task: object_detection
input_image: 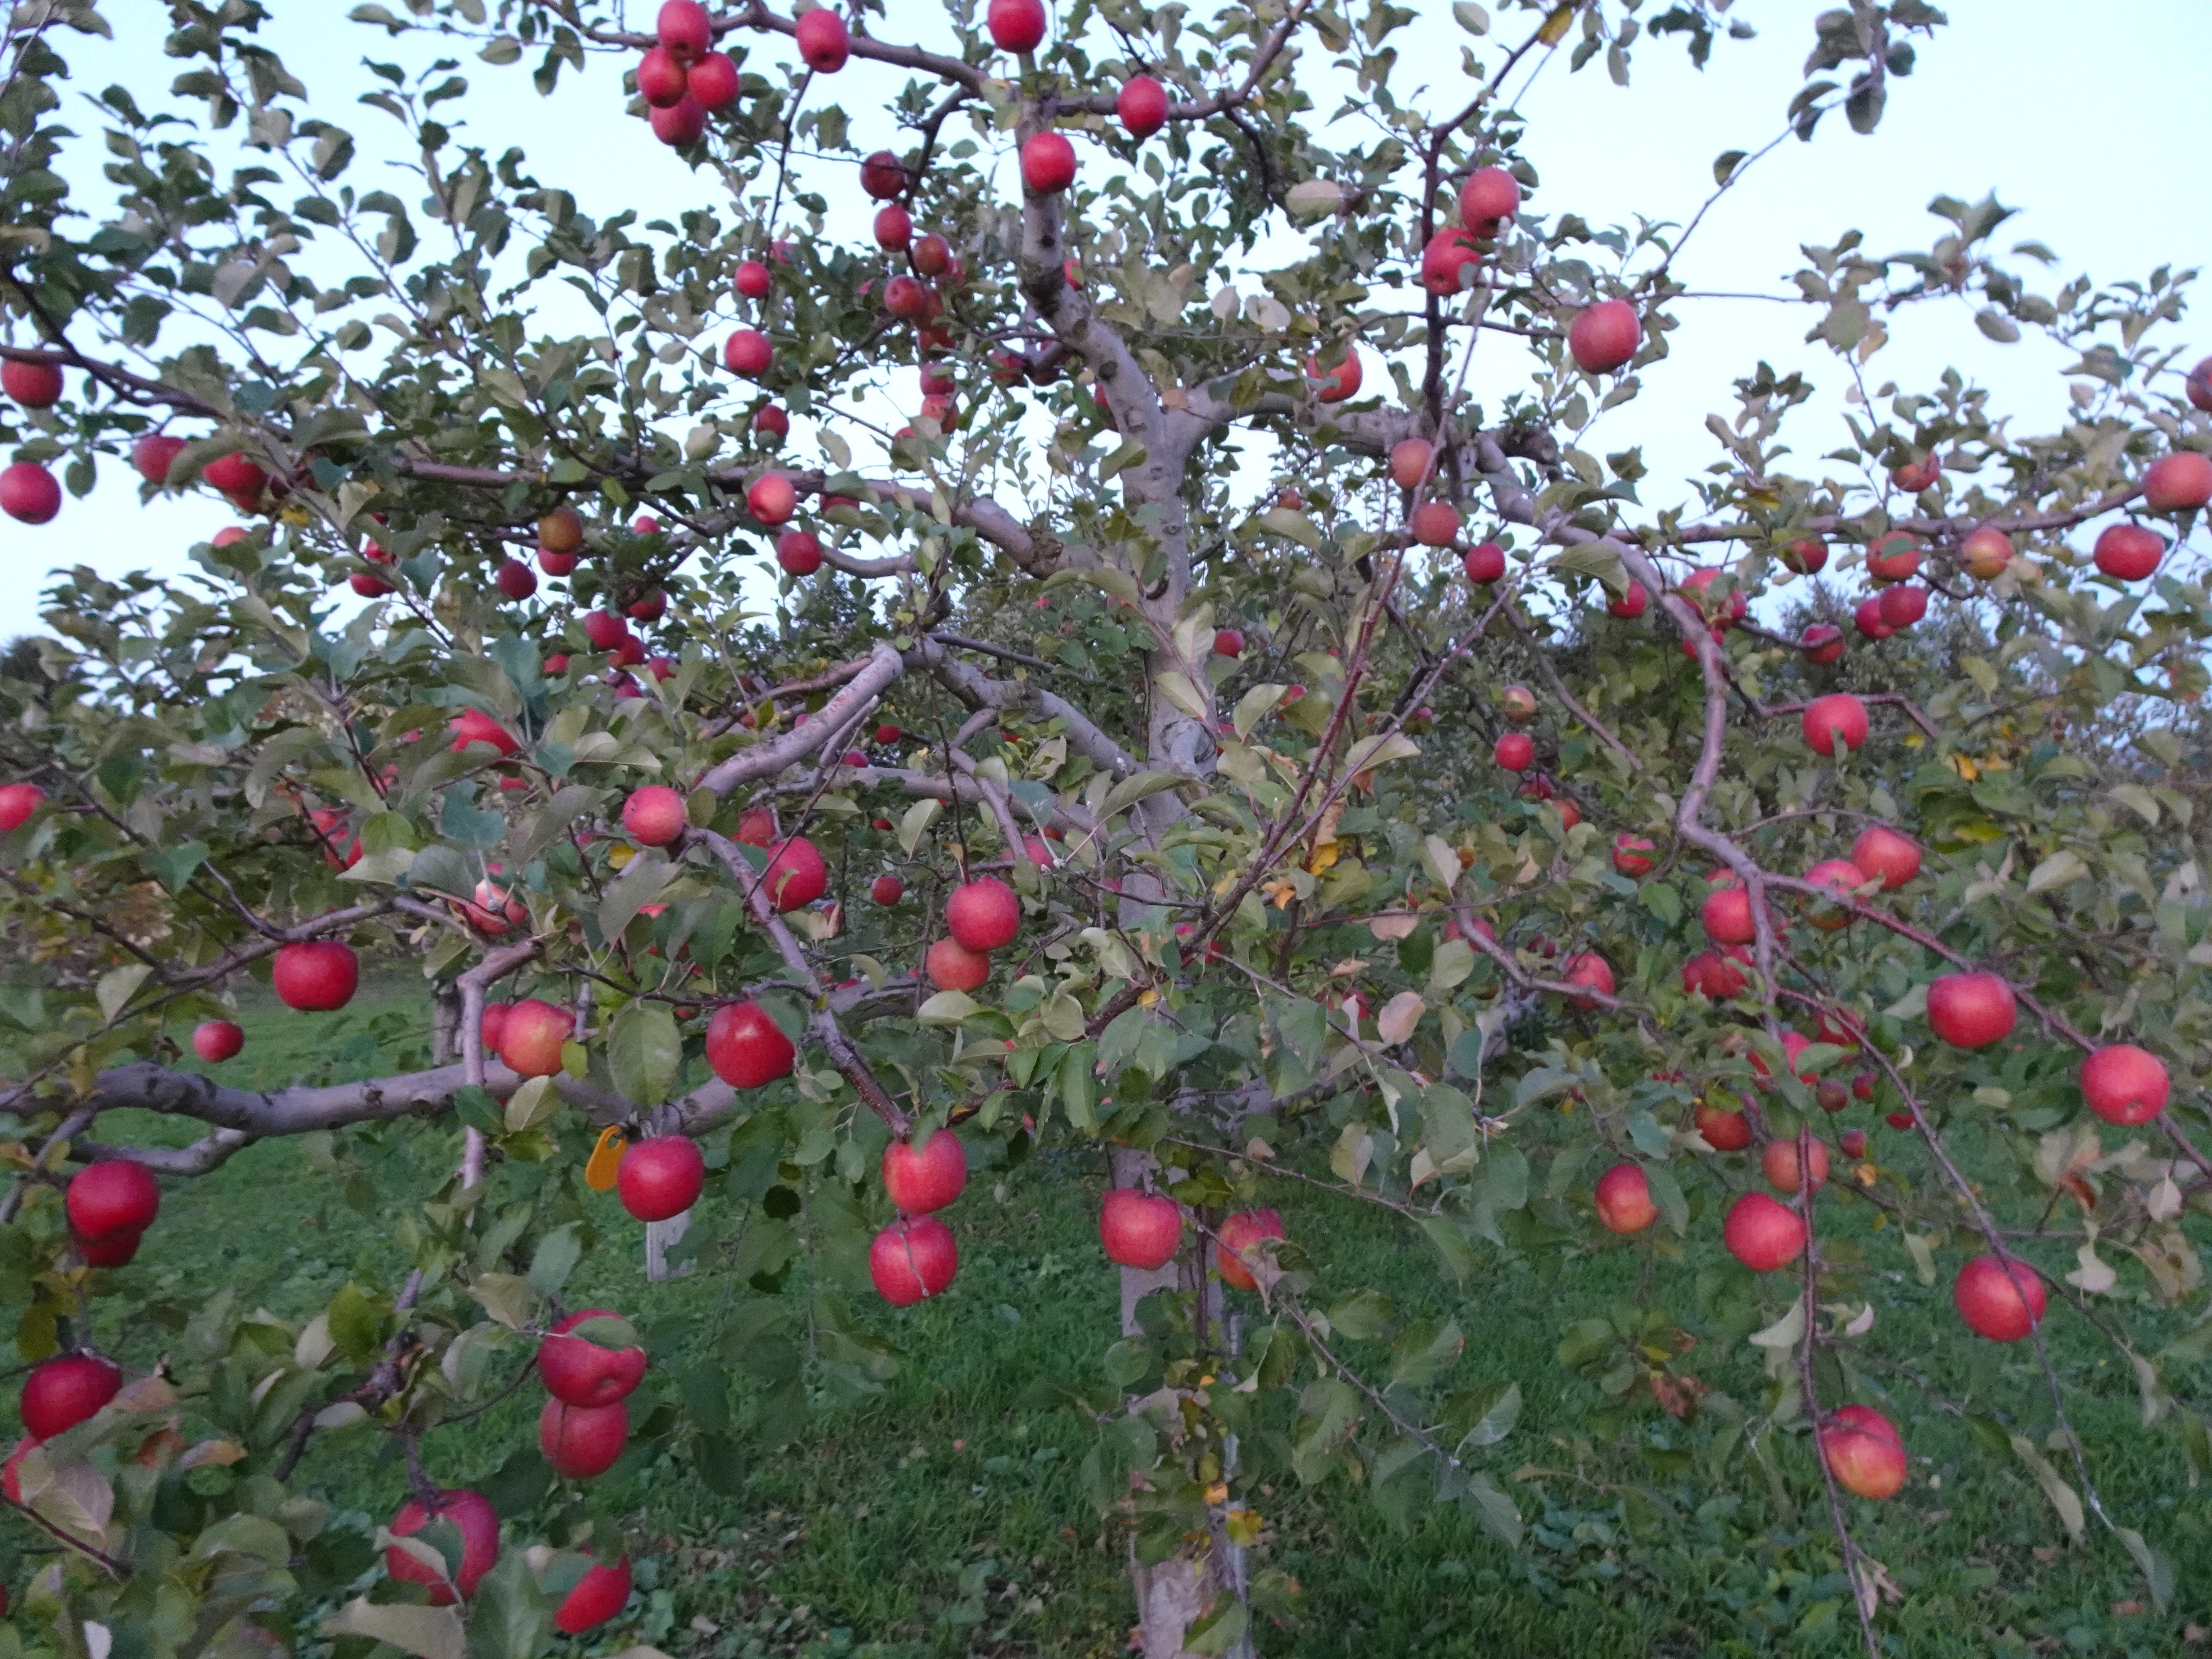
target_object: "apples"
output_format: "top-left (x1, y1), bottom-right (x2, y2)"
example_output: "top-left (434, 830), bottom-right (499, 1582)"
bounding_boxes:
top-left (297, 888), bottom-right (344, 929)
top-left (1569, 298), bottom-right (1642, 376)
top-left (540, 1536), bottom-right (633, 1635)
top-left (869, 1212), bottom-right (957, 1307)
top-left (1952, 1252), bottom-right (2047, 1342)
top-left (1444, 915), bottom-right (1495, 961)
top-left (271, 939), bottom-right (360, 1014)
top-left (1850, 822), bottom-right (1923, 891)
top-left (794, 713), bottom-right (816, 734)
top-left (1524, 925), bottom-right (1565, 961)
top-left (1306, 807), bottom-right (1319, 824)
top-left (2130, 953), bottom-right (2160, 982)
top-left (1402, 877), bottom-right (1434, 911)
top-left (1275, 682), bottom-right (1310, 721)
top-left (1467, 971), bottom-right (1500, 1001)
top-left (1796, 856), bottom-right (1866, 930)
top-left (1543, 795), bottom-right (1581, 833)
top-left (1674, 958), bottom-right (1713, 1000)
top-left (67, 1157), bottom-right (161, 1244)
top-left (1, 348), bottom-right (63, 406)
top-left (1681, 621), bottom-right (1725, 660)
top-left (349, 557), bottom-right (385, 600)
top-left (1492, 734), bottom-right (1535, 772)
top-left (775, 531), bottom-right (823, 578)
top-left (818, 899), bottom-right (849, 930)
top-left (871, 875), bottom-right (902, 907)
top-left (1518, 774), bottom-right (1553, 811)
top-left (1693, 1094), bottom-right (1756, 1154)
top-left (1928, 969), bottom-right (2017, 1049)
top-left (724, 330), bottom-right (772, 380)
top-left (856, 275), bottom-right (892, 313)
top-left (1596, 1160), bottom-right (1662, 1235)
top-left (648, 655), bottom-right (677, 690)
top-left (278, 454), bottom-right (325, 495)
top-left (836, 979), bottom-right (865, 1005)
top-left (1702, 890), bottom-right (1768, 946)
top-left (1061, 623), bottom-right (1077, 637)
top-left (536, 1307), bottom-right (647, 1409)
top-left (1133, 677), bottom-right (1154, 698)
top-left (1414, 703), bottom-right (1433, 724)
top-left (906, 968), bottom-right (929, 988)
top-left (499, 768), bottom-right (542, 807)
top-left (1710, 586), bottom-right (1748, 624)
top-left (875, 717), bottom-right (902, 746)
top-left (884, 273), bottom-right (924, 322)
top-left (1093, 378), bottom-right (1145, 436)
top-left (232, 470), bottom-right (276, 513)
top-left (1410, 499), bottom-right (1459, 548)
top-left (986, 0), bottom-right (1046, 54)
top-left (1852, 1072), bottom-right (1883, 1103)
top-left (1058, 258), bottom-right (1090, 292)
top-left (1493, 684), bottom-right (1536, 726)
top-left (2143, 451), bottom-right (2212, 513)
top-left (384, 1487), bottom-right (501, 1611)
top-left (440, 697), bottom-right (521, 768)
top-left (1108, 583), bottom-right (1153, 625)
top-left (1085, 869), bottom-right (1127, 906)
top-left (726, 799), bottom-right (785, 858)
top-left (616, 1132), bottom-right (706, 1224)
top-left (1855, 598), bottom-right (1901, 640)
top-left (819, 971), bottom-right (841, 986)
top-left (613, 681), bottom-right (643, 713)
top-left (682, 946), bottom-right (713, 979)
top-left (79, 1226), bottom-right (142, 1268)
top-left (366, 562), bottom-right (400, 594)
top-left (295, 806), bottom-right (341, 854)
top-left (639, 45), bottom-right (688, 108)
top-left (1422, 224), bottom-right (1482, 298)
top-left (1956, 527), bottom-right (2014, 580)
top-left (1038, 815), bottom-right (1074, 845)
top-left (402, 717), bottom-right (448, 758)
top-left (705, 995), bottom-right (805, 1090)
top-left (1095, 1095), bottom-right (1149, 1146)
top-left (1362, 710), bottom-right (1403, 741)
top-left (998, 838), bottom-right (1057, 887)
top-left (927, 935), bottom-right (990, 994)
top-left (1759, 912), bottom-right (1792, 943)
top-left (1724, 1191), bottom-right (1811, 1273)
top-left (1041, 333), bottom-right (1075, 368)
top-left (1679, 568), bottom-right (1735, 621)
top-left (1760, 1131), bottom-right (1830, 1196)
top-left (1652, 1062), bottom-right (1689, 1096)
top-left (1465, 543), bottom-right (1506, 587)
top-left (1886, 442), bottom-right (1940, 492)
top-left (686, 53), bottom-right (740, 112)
top-left (1878, 586), bottom-right (1928, 629)
top-left (986, 349), bottom-right (1026, 389)
top-left (1571, 1075), bottom-right (1593, 1105)
top-left (1212, 1212), bottom-right (1287, 1292)
top-left (913, 235), bottom-right (950, 276)
top-left (192, 1020), bottom-right (246, 1066)
top-left (0, 781), bottom-right (52, 836)
top-left (2092, 524), bottom-right (2165, 583)
top-left (1214, 627), bottom-right (1244, 661)
top-left (917, 316), bottom-right (957, 361)
top-left (969, 661), bottom-right (993, 681)
top-left (492, 561), bottom-right (538, 603)
top-left (1452, 846), bottom-right (1476, 872)
top-left (580, 610), bottom-right (628, 655)
top-left (1211, 723), bottom-right (1246, 758)
top-left (1459, 167), bottom-right (1520, 242)
top-left (18, 1346), bottom-right (134, 1448)
top-left (1304, 341), bottom-right (1363, 404)
top-left (1815, 1082), bottom-right (1847, 1113)
top-left (1389, 439), bottom-right (1441, 492)
top-left (366, 532), bottom-right (399, 569)
top-left (477, 1001), bottom-right (529, 1053)
top-left (934, 785), bottom-right (956, 808)
top-left (795, 8), bottom-right (850, 74)
top-left (2185, 356), bottom-right (2212, 415)
top-left (606, 632), bottom-right (645, 677)
top-left (621, 784), bottom-right (685, 849)
top-left (889, 426), bottom-right (932, 473)
top-left (2052, 715), bottom-right (2075, 739)
top-left (1865, 530), bottom-right (1921, 581)
top-left (632, 514), bottom-right (660, 546)
top-left (1101, 1188), bottom-right (1183, 1272)
top-left (1781, 529), bottom-right (1828, 576)
top-left (2, 1440), bottom-right (74, 1508)
top-left (1034, 594), bottom-right (1052, 613)
top-left (735, 260), bottom-right (774, 297)
top-left (872, 811), bottom-right (893, 834)
top-left (920, 363), bottom-right (955, 403)
top-left (882, 1127), bottom-right (968, 1214)
top-left (1606, 579), bottom-right (1647, 619)
top-left (1800, 622), bottom-right (1844, 664)
top-left (1613, 831), bottom-right (1657, 878)
top-left (741, 713), bottom-right (756, 731)
top-left (781, 676), bottom-right (807, 702)
top-left (818, 481), bottom-right (860, 525)
top-left (631, 902), bottom-right (690, 963)
top-left (630, 583), bottom-right (668, 623)
top-left (371, 764), bottom-right (406, 799)
top-left (1116, 73), bottom-right (1170, 138)
top-left (947, 878), bottom-right (1021, 955)
top-left (861, 151), bottom-right (910, 198)
top-left (1275, 487), bottom-right (1305, 515)
top-left (687, 767), bottom-right (704, 788)
top-left (1746, 1031), bottom-right (1820, 1101)
top-left (370, 508), bottom-right (396, 528)
top-left (1024, 350), bottom-right (1062, 386)
top-left (0, 462), bottom-right (62, 524)
top-left (2078, 1042), bottom-right (2170, 1128)
top-left (210, 526), bottom-right (259, 573)
top-left (840, 750), bottom-right (868, 774)
top-left (873, 206), bottom-right (911, 253)
top-left (1326, 647), bottom-right (1342, 663)
top-left (571, 828), bottom-right (611, 869)
top-left (1696, 940), bottom-right (1756, 997)
top-left (649, 86), bottom-right (703, 147)
top-left (1837, 1128), bottom-right (1873, 1159)
top-left (998, 1003), bottom-right (1049, 1055)
top-left (540, 509), bottom-right (584, 555)
top-left (1701, 869), bottom-right (1744, 911)
top-left (738, 674), bottom-right (767, 700)
top-left (1515, 968), bottom-right (1553, 1002)
top-left (914, 284), bottom-right (954, 332)
top-left (1810, 1000), bottom-right (1866, 1058)
top-left (1174, 920), bottom-right (1227, 967)
top-left (1813, 1403), bottom-right (1906, 1502)
top-left (921, 394), bottom-right (960, 435)
top-left (1883, 1091), bottom-right (1921, 1133)
top-left (1557, 951), bottom-right (1615, 1010)
top-left (1008, 1105), bottom-right (1036, 1133)
top-left (657, 0), bottom-right (712, 63)
top-left (675, 994), bottom-right (701, 1019)
top-left (1801, 693), bottom-right (1868, 756)
top-left (461, 862), bottom-right (530, 935)
top-left (1002, 963), bottom-right (1030, 991)
top-left (205, 438), bottom-right (265, 493)
top-left (497, 997), bottom-right (581, 1081)
top-left (537, 1387), bottom-right (632, 1480)
top-left (134, 436), bottom-right (197, 486)
top-left (539, 536), bottom-right (581, 578)
top-left (325, 827), bottom-right (370, 873)
top-left (538, 650), bottom-right (577, 687)
top-left (746, 472), bottom-right (797, 526)
top-left (764, 240), bottom-right (802, 270)
top-left (935, 256), bottom-right (975, 300)
top-left (750, 401), bottom-right (790, 442)
top-left (1020, 130), bottom-right (1078, 198)
top-left (750, 835), bottom-right (828, 916)
top-left (1002, 717), bottom-right (1031, 746)
top-left (1314, 984), bottom-right (1371, 1036)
